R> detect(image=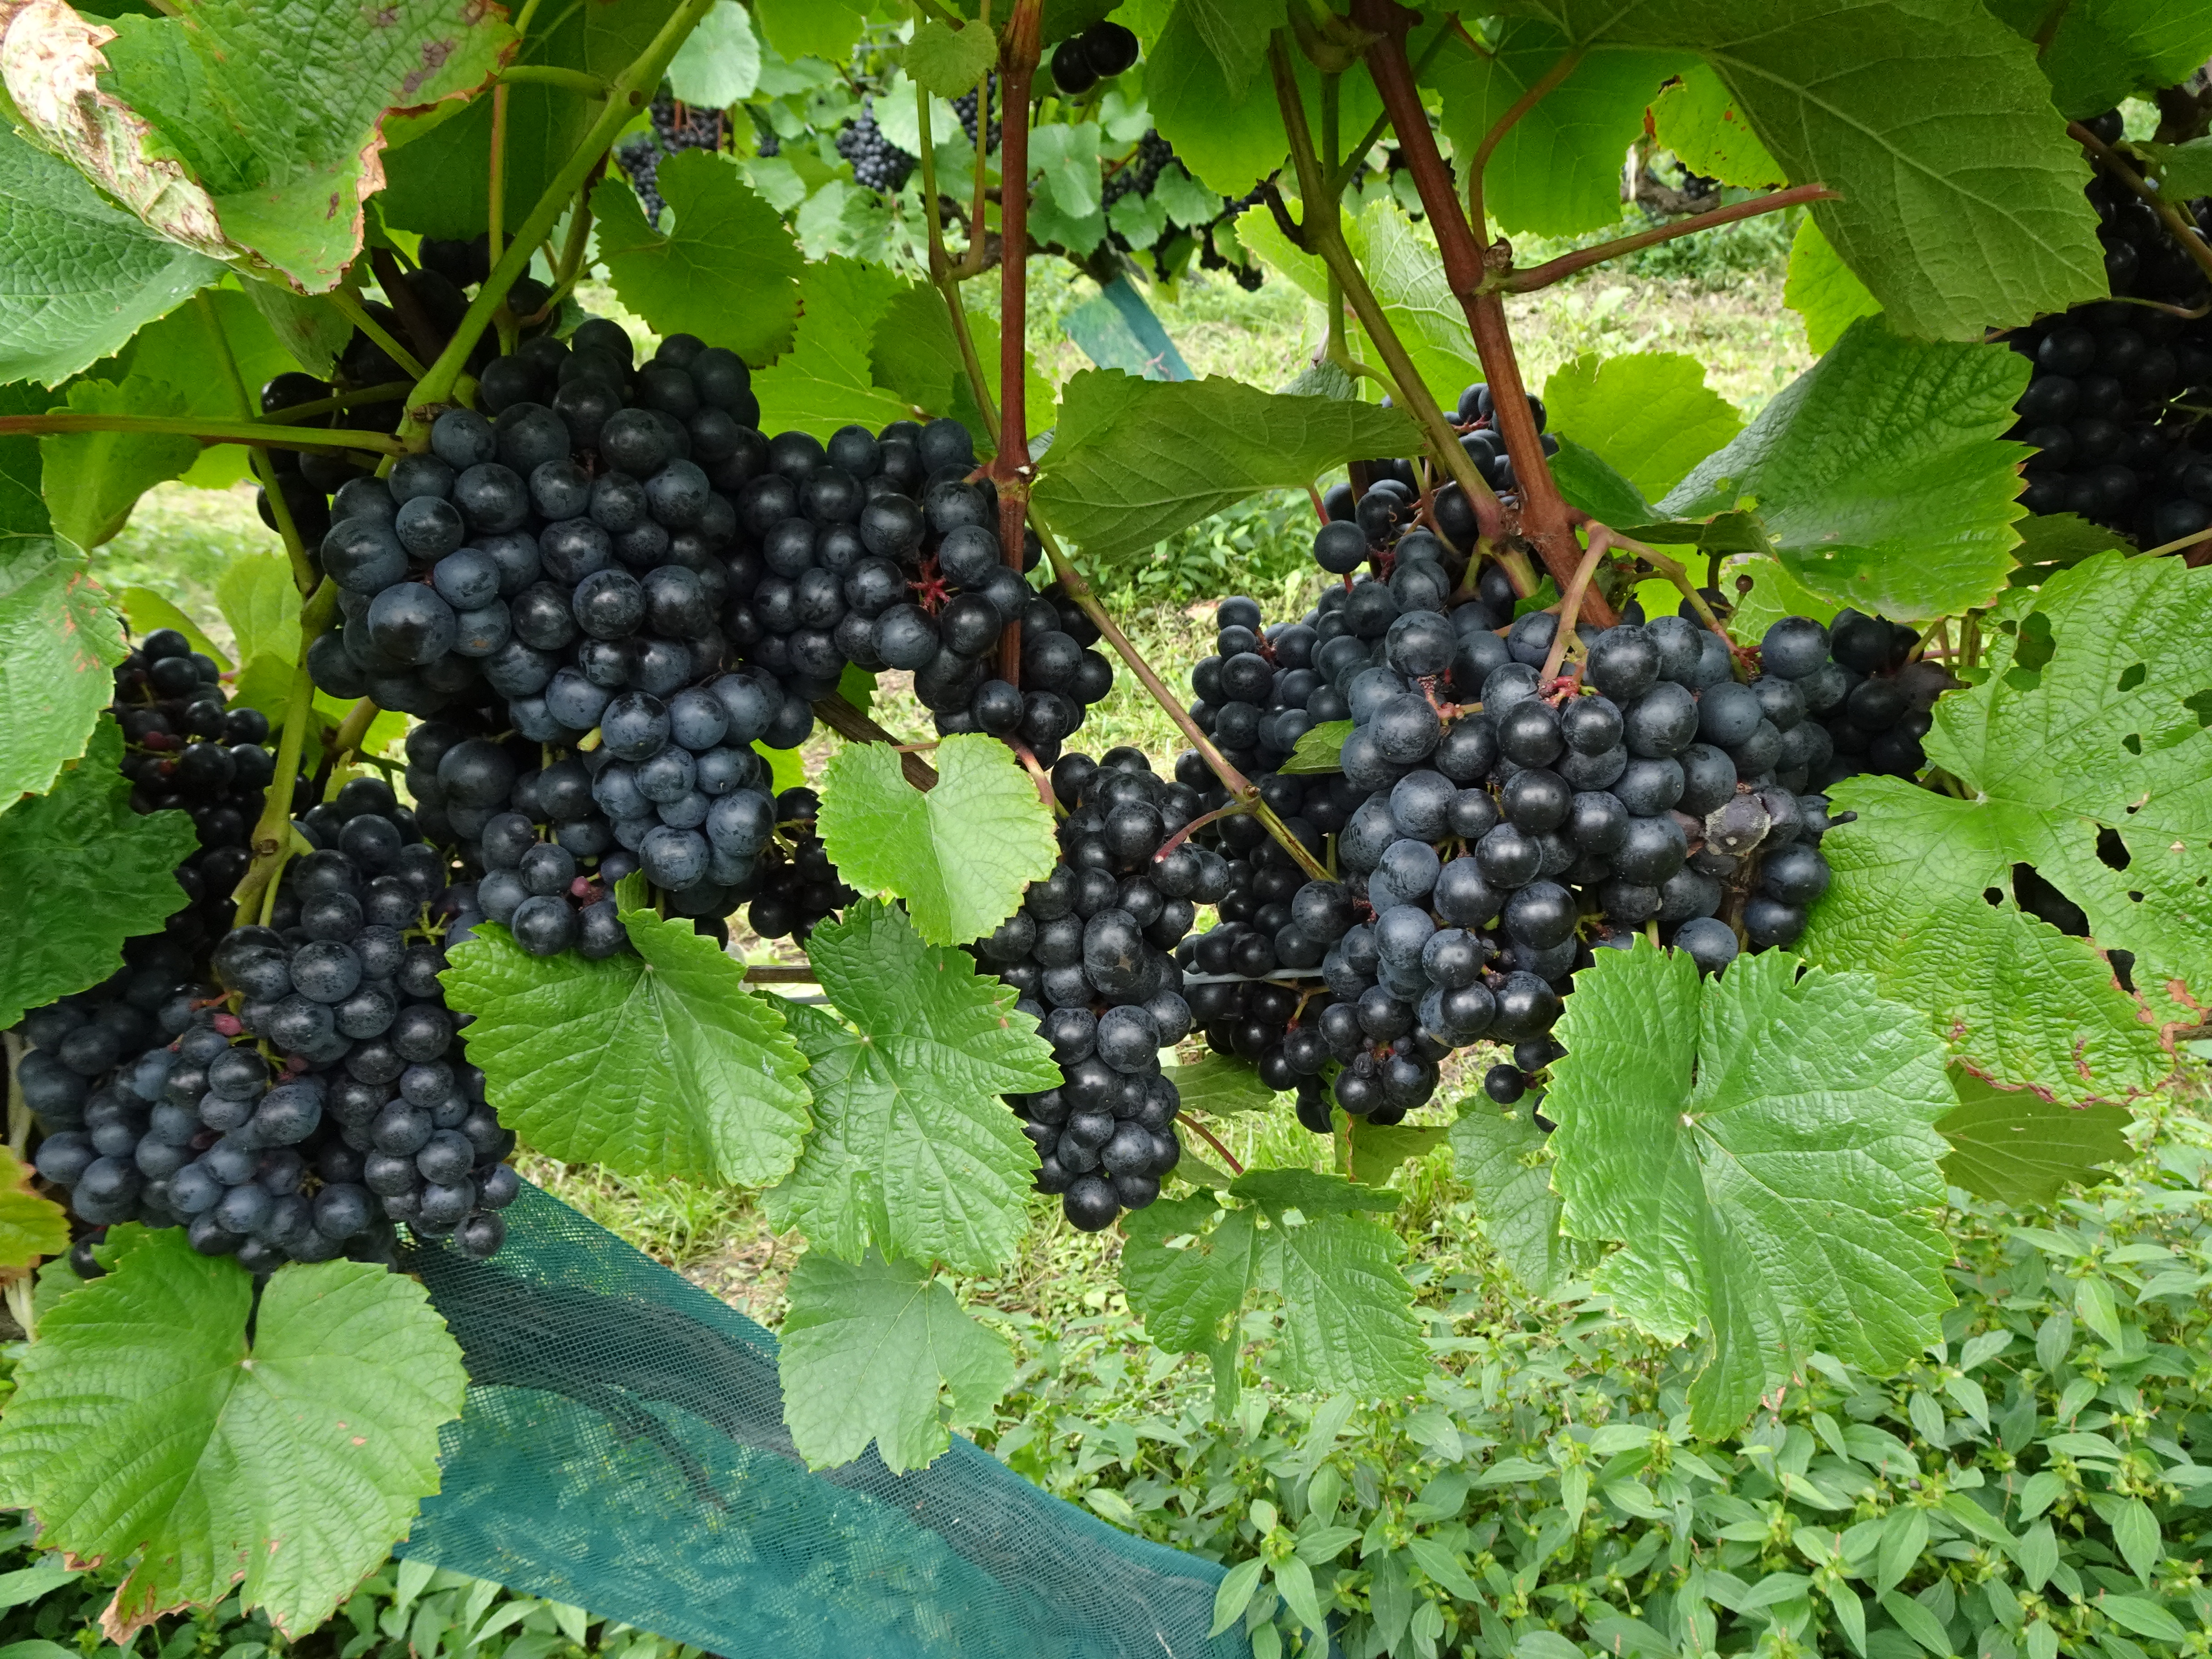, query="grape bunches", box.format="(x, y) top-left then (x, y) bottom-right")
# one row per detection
(1756, 615), (1851, 948)
(714, 419), (976, 750)
(979, 747), (1233, 1234)
(1292, 880), (1451, 1126)
(404, 724), (640, 963)
(132, 995), (398, 1267)
(6, 955), (177, 1280)
(1990, 107), (2212, 556)
(1174, 596), (1272, 814)
(105, 629), (313, 983)
(303, 319), (772, 918)
(1218, 767), (1376, 937)
(1339, 608), (1629, 1045)
(1343, 386), (1563, 546)
(838, 485), (1111, 774)
(1176, 922), (1334, 1137)
(1272, 478), (1515, 752)
(209, 778), (521, 1261)
(1620, 617), (1779, 978)
(1818, 609), (1958, 792)
(748, 785), (861, 953)
(1483, 1036), (1569, 1132)
(248, 232), (561, 595)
